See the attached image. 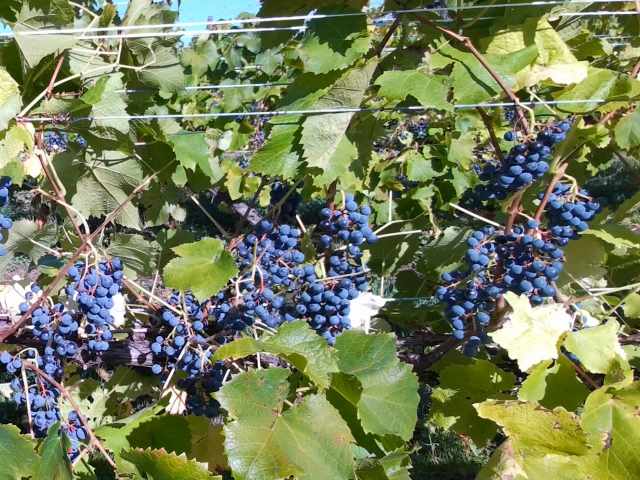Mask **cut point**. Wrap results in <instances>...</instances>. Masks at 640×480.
<instances>
[{
    "label": "cut point",
    "instance_id": "1",
    "mask_svg": "<svg viewBox=\"0 0 640 480\" xmlns=\"http://www.w3.org/2000/svg\"><path fill=\"white\" fill-rule=\"evenodd\" d=\"M514 101L517 103V106L520 107L522 110L528 111L530 124L532 125V127H535L536 126V111L532 107H523L522 106V100L519 97H517Z\"/></svg>",
    "mask_w": 640,
    "mask_h": 480
},
{
    "label": "cut point",
    "instance_id": "2",
    "mask_svg": "<svg viewBox=\"0 0 640 480\" xmlns=\"http://www.w3.org/2000/svg\"><path fill=\"white\" fill-rule=\"evenodd\" d=\"M88 246H89L90 250L85 253V257L89 258L90 256H92L93 260L97 261L98 260V254L96 252L95 245L92 242H90V244Z\"/></svg>",
    "mask_w": 640,
    "mask_h": 480
},
{
    "label": "cut point",
    "instance_id": "3",
    "mask_svg": "<svg viewBox=\"0 0 640 480\" xmlns=\"http://www.w3.org/2000/svg\"><path fill=\"white\" fill-rule=\"evenodd\" d=\"M562 177L567 181H571L573 189L577 188V180H576V178L574 176H570L567 173H563Z\"/></svg>",
    "mask_w": 640,
    "mask_h": 480
},
{
    "label": "cut point",
    "instance_id": "4",
    "mask_svg": "<svg viewBox=\"0 0 640 480\" xmlns=\"http://www.w3.org/2000/svg\"><path fill=\"white\" fill-rule=\"evenodd\" d=\"M335 193L340 194V197H341V203H342V204H345V197H346V194H345L344 190H343V189H341V188H336Z\"/></svg>",
    "mask_w": 640,
    "mask_h": 480
},
{
    "label": "cut point",
    "instance_id": "5",
    "mask_svg": "<svg viewBox=\"0 0 640 480\" xmlns=\"http://www.w3.org/2000/svg\"><path fill=\"white\" fill-rule=\"evenodd\" d=\"M45 300H46V301H47V303H48V307H49V309H50V310H53V309H54V307H55V303L53 302V300H52L51 296H50V295H48V296L45 298Z\"/></svg>",
    "mask_w": 640,
    "mask_h": 480
}]
</instances>
